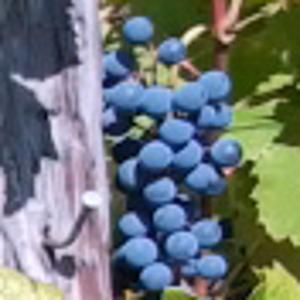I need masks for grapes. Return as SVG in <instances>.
Wrapping results in <instances>:
<instances>
[{"label": "grapes", "instance_id": "1", "mask_svg": "<svg viewBox=\"0 0 300 300\" xmlns=\"http://www.w3.org/2000/svg\"><path fill=\"white\" fill-rule=\"evenodd\" d=\"M146 17L123 26L125 49L99 59V126L114 138L112 159L125 210L116 232L125 238L117 263L137 272L140 287L159 295L176 280L222 279L228 260L206 250L222 246L227 228L202 217L203 200H218L229 191L222 170L245 157L244 144L224 136L231 108L223 102L234 93L227 71L213 67L185 77L181 65L187 44L167 37L151 41Z\"/></svg>", "mask_w": 300, "mask_h": 300}]
</instances>
